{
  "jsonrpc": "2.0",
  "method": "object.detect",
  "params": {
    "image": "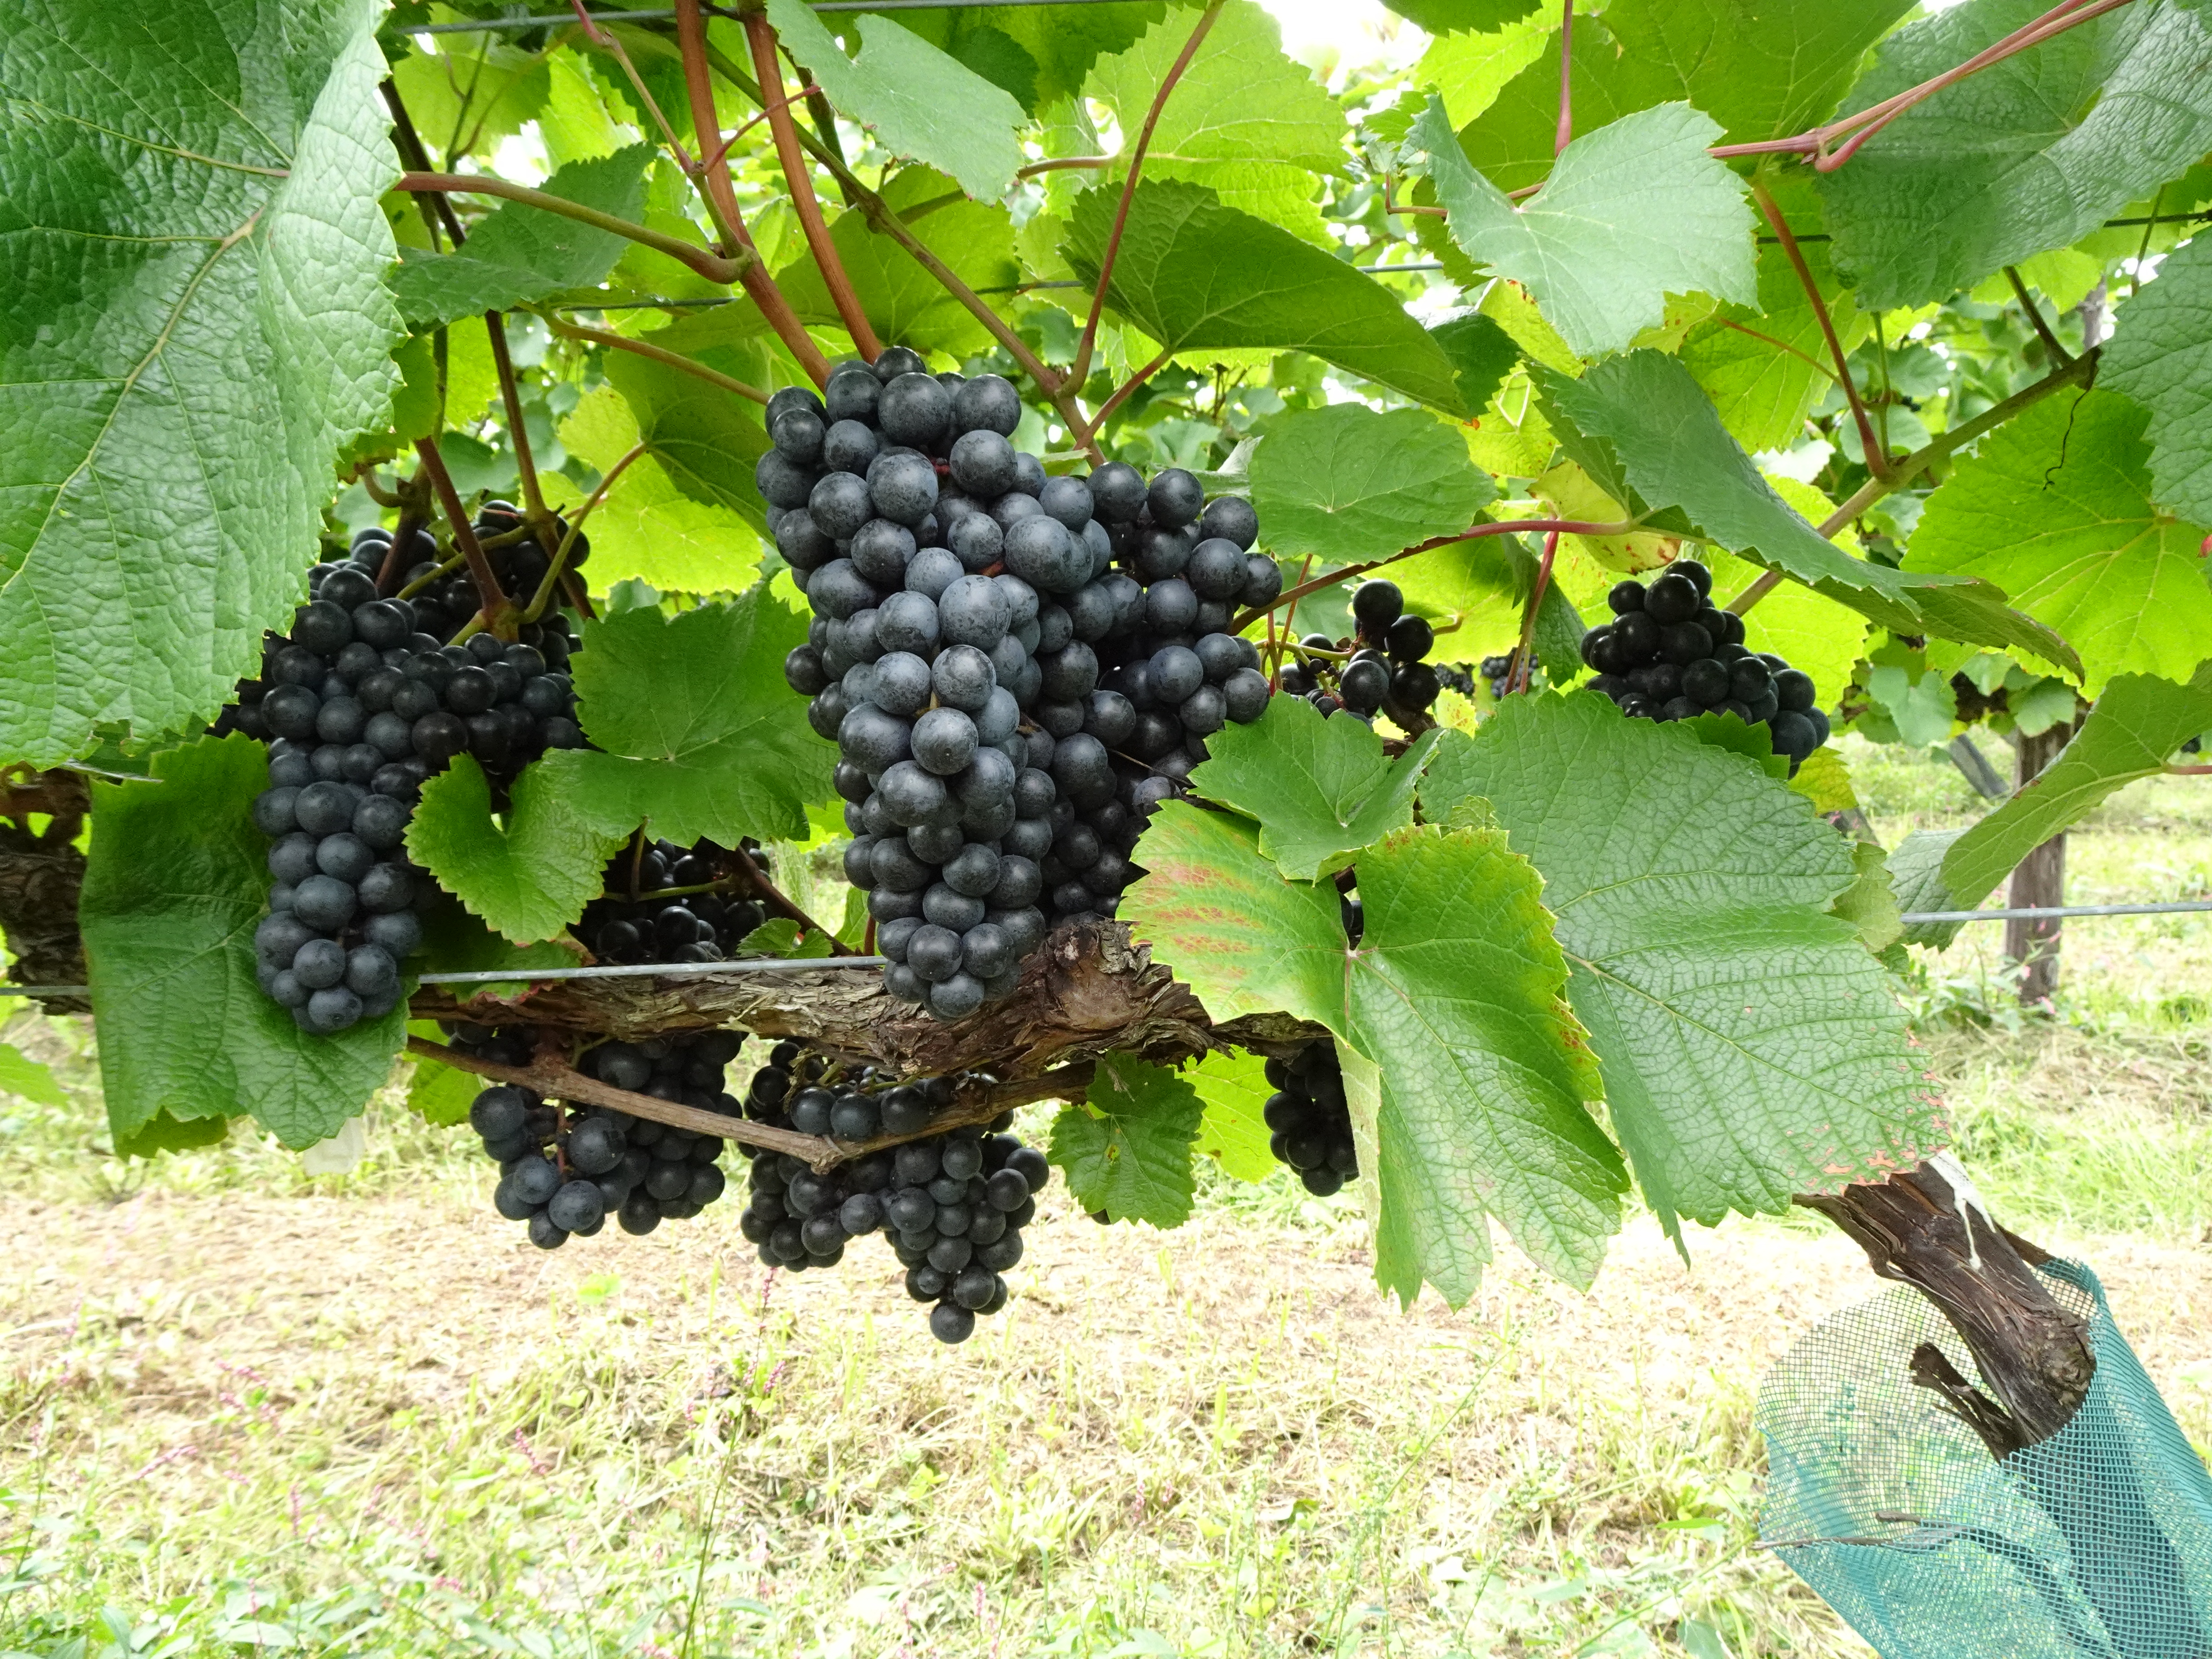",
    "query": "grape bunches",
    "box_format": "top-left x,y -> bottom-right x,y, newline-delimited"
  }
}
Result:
595,906 -> 748,1235
1581,560 -> 1830,781
1091,1208 -> 1111,1225
1087,462 -> 1281,823
1335,889 -> 1364,950
580,837 -> 771,944
873,1069 -> 1049,1343
737,1036 -> 845,1271
776,1087 -> 889,1255
1039,762 -> 1151,917
441,634 -> 591,793
755,345 -> 1148,1020
470,1039 -> 652,1249
452,499 -> 589,670
1280,580 -> 1439,719
1263,1041 -> 1361,1197
204,526 -> 507,1034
